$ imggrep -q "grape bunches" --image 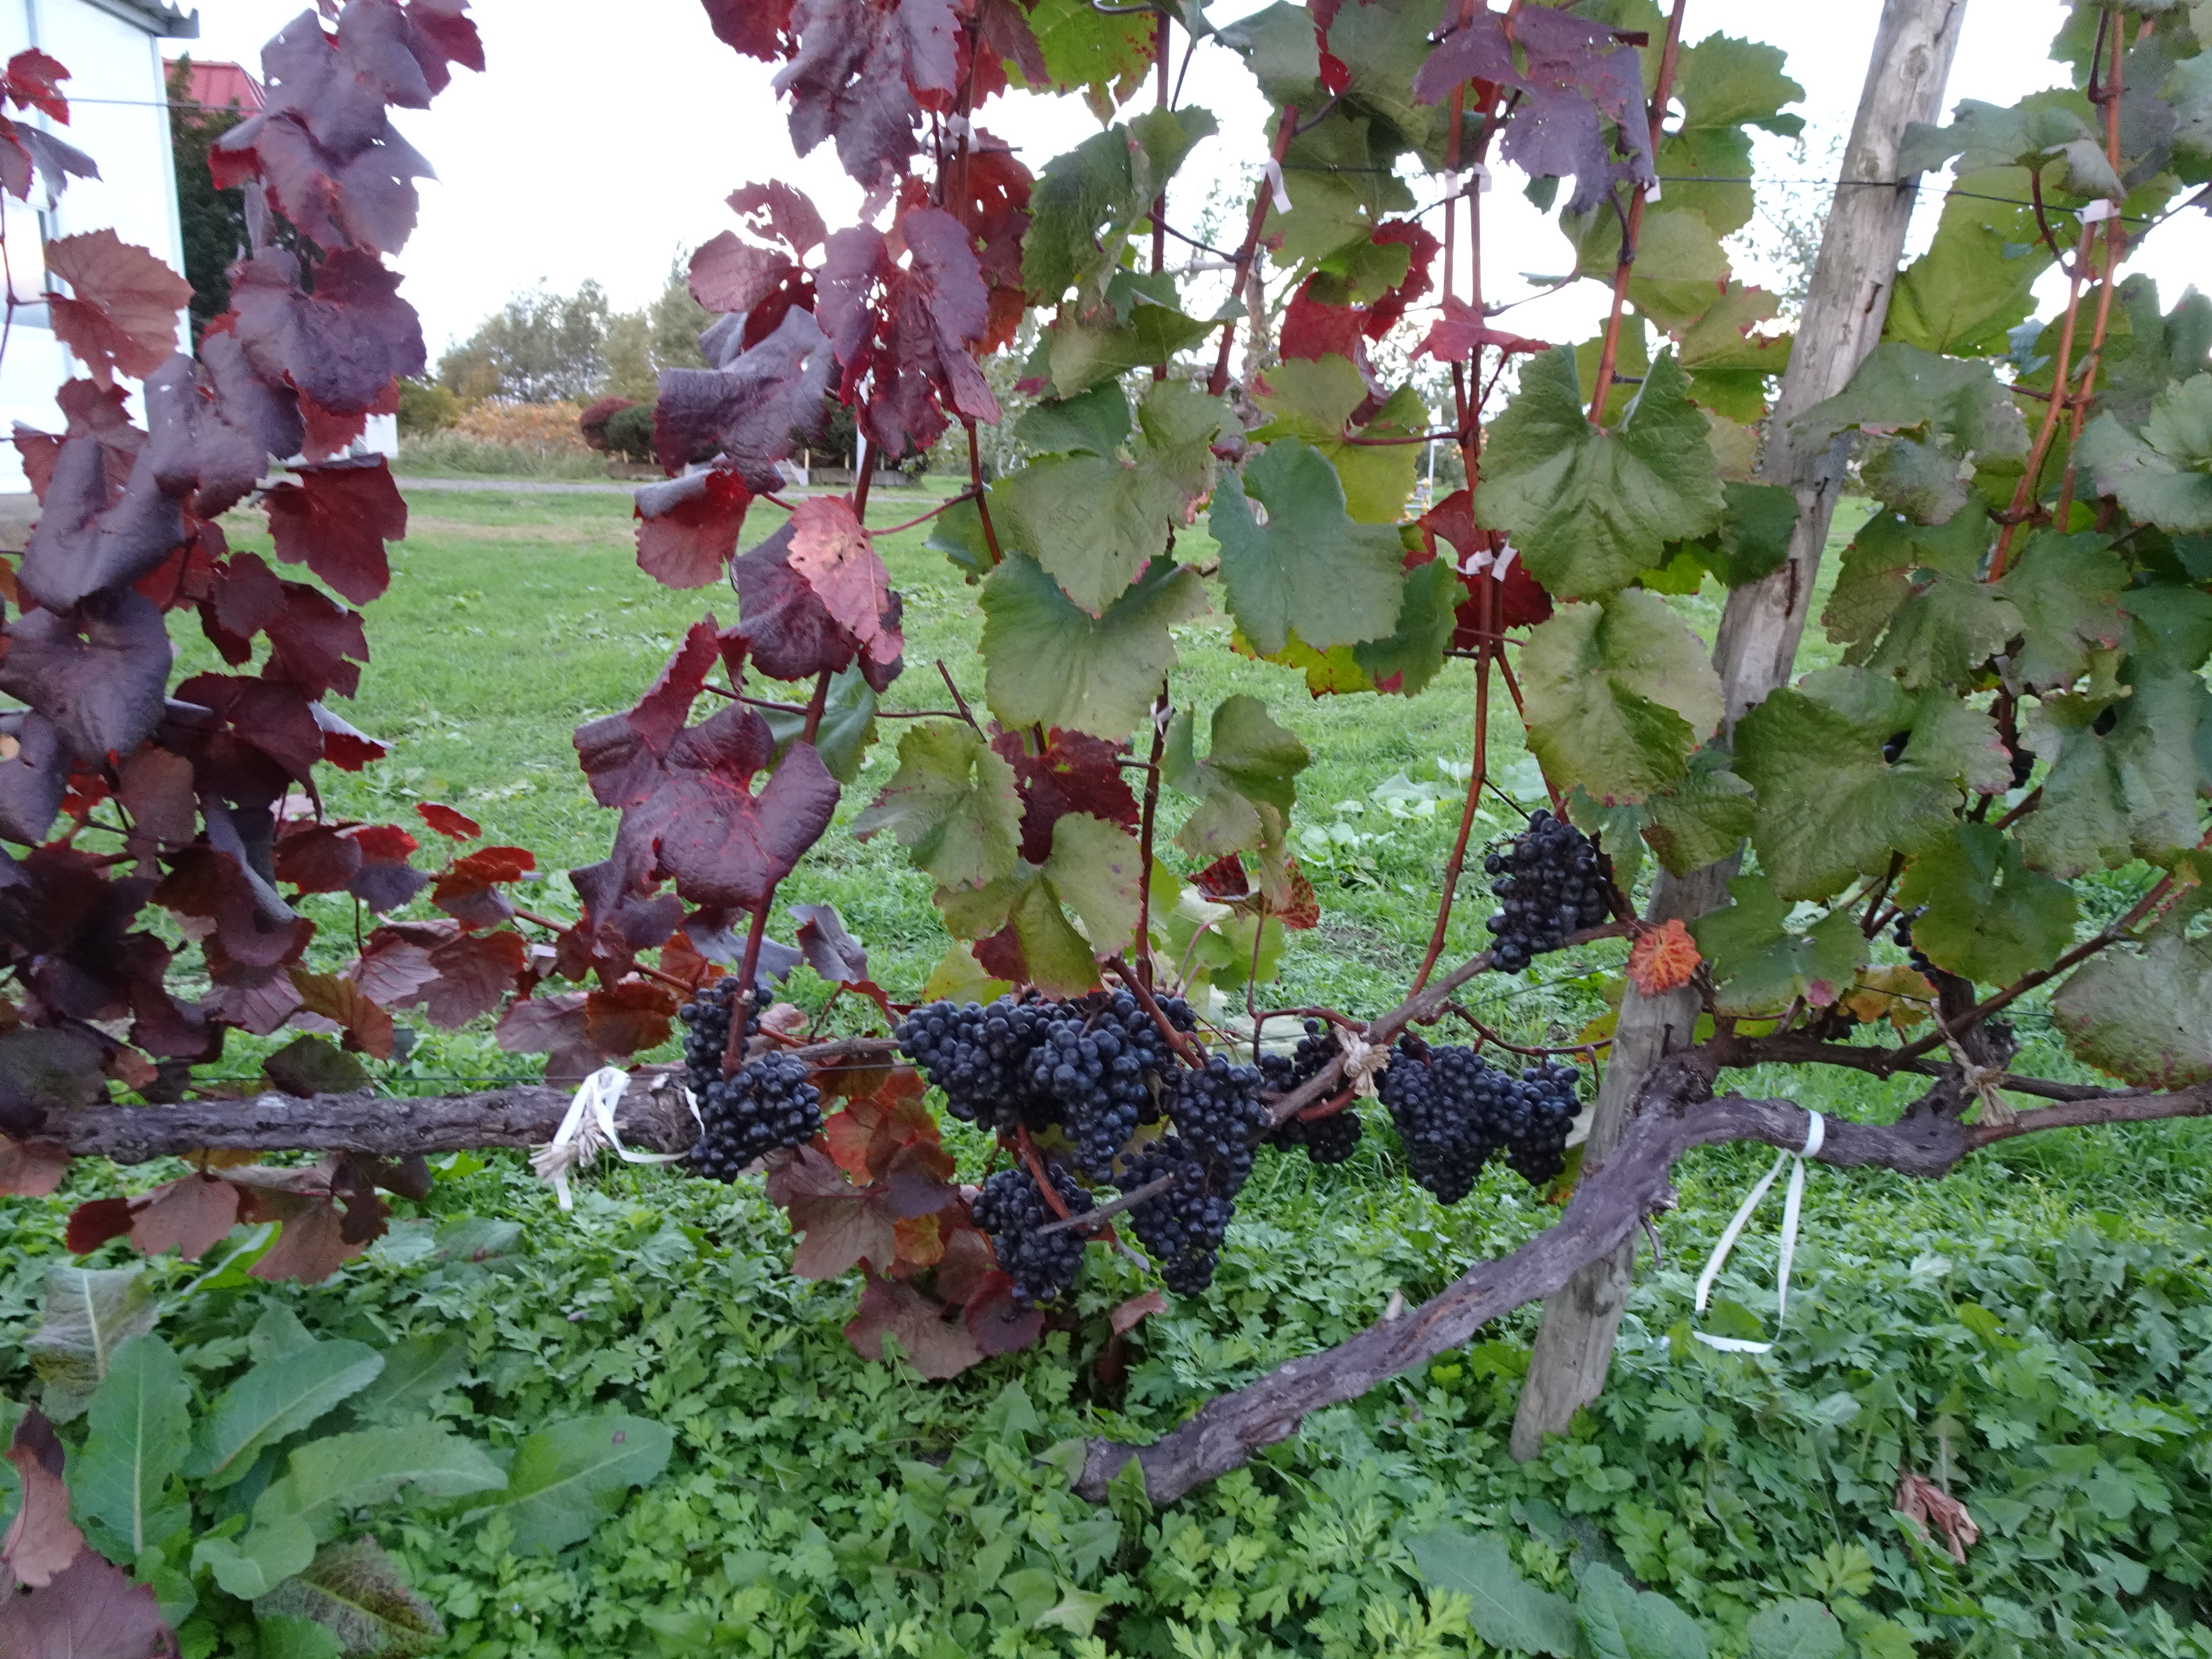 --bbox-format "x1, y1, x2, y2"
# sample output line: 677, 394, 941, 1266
1023, 1020, 1151, 1182
1504, 1052, 1589, 1190
1876, 714, 1916, 768
1823, 999, 1862, 1045
676, 971, 774, 1104
1985, 716, 2043, 804
1107, 1137, 1233, 1302
1479, 806, 1612, 976
1369, 1030, 1448, 1172
1891, 892, 1955, 996
1251, 1040, 1319, 1157
1291, 1014, 1365, 1166
1095, 984, 1197, 1086
1009, 999, 1087, 1039
1425, 1045, 1543, 1207
891, 999, 1025, 1132
688, 1048, 827, 1187
1172, 1047, 1272, 1205
969, 1161, 1098, 1308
